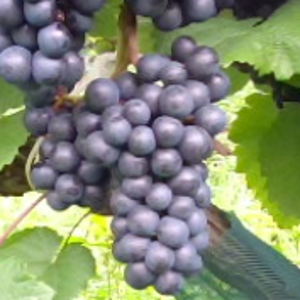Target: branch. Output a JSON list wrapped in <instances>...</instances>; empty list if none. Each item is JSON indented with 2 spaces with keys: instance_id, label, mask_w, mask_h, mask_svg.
<instances>
[{
  "instance_id": "branch-1",
  "label": "branch",
  "mask_w": 300,
  "mask_h": 300,
  "mask_svg": "<svg viewBox=\"0 0 300 300\" xmlns=\"http://www.w3.org/2000/svg\"><path fill=\"white\" fill-rule=\"evenodd\" d=\"M119 28L121 36L118 47V58L114 68L110 72L112 78H116L121 74L128 67V64L136 66L139 60L136 14L129 10L125 4L120 6Z\"/></svg>"
}]
</instances>
